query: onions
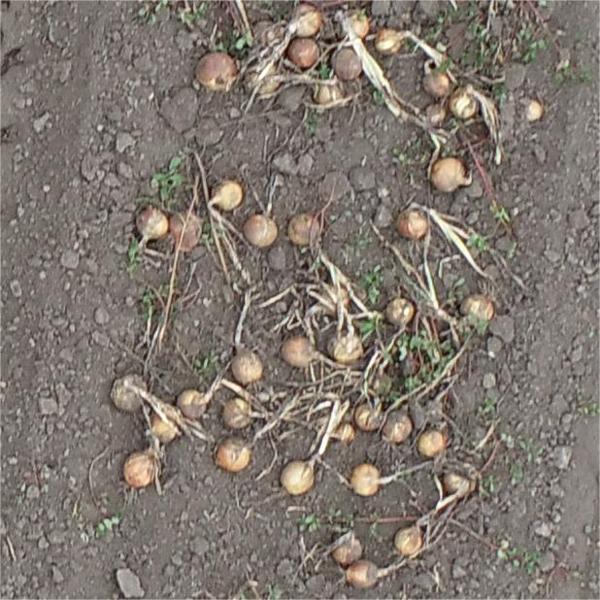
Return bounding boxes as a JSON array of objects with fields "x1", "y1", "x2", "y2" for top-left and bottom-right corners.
[
  {"x1": 248, "y1": 60, "x2": 282, "y2": 94},
  {"x1": 286, "y1": 212, "x2": 317, "y2": 247},
  {"x1": 354, "y1": 400, "x2": 381, "y2": 429},
  {"x1": 463, "y1": 293, "x2": 495, "y2": 319},
  {"x1": 135, "y1": 206, "x2": 168, "y2": 239},
  {"x1": 430, "y1": 155, "x2": 468, "y2": 190},
  {"x1": 381, "y1": 413, "x2": 411, "y2": 442},
  {"x1": 346, "y1": 461, "x2": 378, "y2": 495},
  {"x1": 212, "y1": 435, "x2": 250, "y2": 471},
  {"x1": 147, "y1": 408, "x2": 179, "y2": 443},
  {"x1": 289, "y1": 37, "x2": 318, "y2": 67},
  {"x1": 394, "y1": 206, "x2": 427, "y2": 239},
  {"x1": 310, "y1": 74, "x2": 347, "y2": 108},
  {"x1": 121, "y1": 451, "x2": 156, "y2": 486},
  {"x1": 329, "y1": 533, "x2": 360, "y2": 564},
  {"x1": 343, "y1": 14, "x2": 370, "y2": 38},
  {"x1": 334, "y1": 421, "x2": 354, "y2": 443},
  {"x1": 228, "y1": 350, "x2": 262, "y2": 384},
  {"x1": 332, "y1": 50, "x2": 361, "y2": 81},
  {"x1": 448, "y1": 91, "x2": 479, "y2": 119},
  {"x1": 330, "y1": 332, "x2": 364, "y2": 364},
  {"x1": 251, "y1": 20, "x2": 284, "y2": 54},
  {"x1": 177, "y1": 386, "x2": 205, "y2": 412},
  {"x1": 523, "y1": 97, "x2": 545, "y2": 120},
  {"x1": 195, "y1": 51, "x2": 235, "y2": 89},
  {"x1": 344, "y1": 559, "x2": 375, "y2": 588},
  {"x1": 111, "y1": 375, "x2": 143, "y2": 409},
  {"x1": 320, "y1": 284, "x2": 349, "y2": 316},
  {"x1": 424, "y1": 64, "x2": 453, "y2": 97},
  {"x1": 437, "y1": 471, "x2": 470, "y2": 501},
  {"x1": 291, "y1": 5, "x2": 325, "y2": 38},
  {"x1": 210, "y1": 179, "x2": 242, "y2": 209},
  {"x1": 219, "y1": 392, "x2": 251, "y2": 426},
  {"x1": 422, "y1": 103, "x2": 447, "y2": 127},
  {"x1": 415, "y1": 428, "x2": 445, "y2": 456},
  {"x1": 172, "y1": 215, "x2": 202, "y2": 249},
  {"x1": 393, "y1": 526, "x2": 423, "y2": 555},
  {"x1": 373, "y1": 29, "x2": 402, "y2": 54},
  {"x1": 384, "y1": 297, "x2": 414, "y2": 325},
  {"x1": 243, "y1": 213, "x2": 276, "y2": 246},
  {"x1": 279, "y1": 459, "x2": 315, "y2": 493},
  {"x1": 281, "y1": 335, "x2": 312, "y2": 365}
]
